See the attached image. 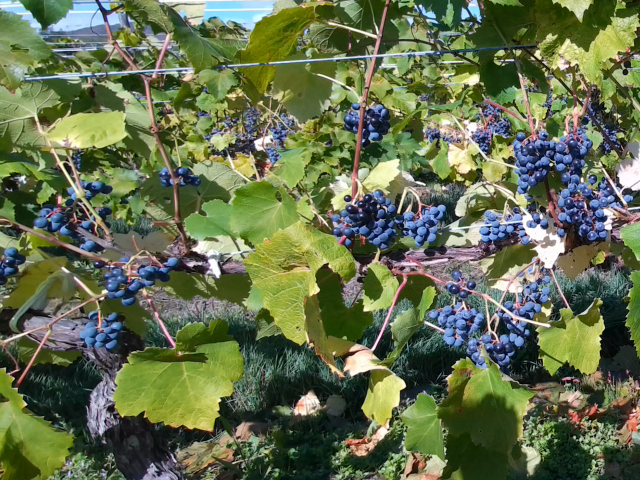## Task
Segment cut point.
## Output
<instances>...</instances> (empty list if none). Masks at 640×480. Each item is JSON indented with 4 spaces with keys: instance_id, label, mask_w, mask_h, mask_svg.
Segmentation results:
<instances>
[{
    "instance_id": "cut-point-1",
    "label": "cut point",
    "mask_w": 640,
    "mask_h": 480,
    "mask_svg": "<svg viewBox=\"0 0 640 480\" xmlns=\"http://www.w3.org/2000/svg\"><path fill=\"white\" fill-rule=\"evenodd\" d=\"M143 253H145L147 256H149V257H151V258H154V255H153V254L149 253L147 249L142 248V250H141V251H139L137 254H135V255H133V256H131V257L129 258V261L127 262V264H130L132 260L136 259L137 257H139L140 255H142Z\"/></svg>"
},
{
    "instance_id": "cut-point-2",
    "label": "cut point",
    "mask_w": 640,
    "mask_h": 480,
    "mask_svg": "<svg viewBox=\"0 0 640 480\" xmlns=\"http://www.w3.org/2000/svg\"><path fill=\"white\" fill-rule=\"evenodd\" d=\"M158 132H159V133H167V134H169L170 136H172V137L175 139V150H176V153H179V148H178V137H177L174 133H172L170 130H161V129H158Z\"/></svg>"
},
{
    "instance_id": "cut-point-3",
    "label": "cut point",
    "mask_w": 640,
    "mask_h": 480,
    "mask_svg": "<svg viewBox=\"0 0 640 480\" xmlns=\"http://www.w3.org/2000/svg\"><path fill=\"white\" fill-rule=\"evenodd\" d=\"M406 191H408V192L412 193V194L416 197V199H417V201H418V206H421V198H420L419 194H417V192H415V191H414L413 189H411V188H406Z\"/></svg>"
},
{
    "instance_id": "cut-point-4",
    "label": "cut point",
    "mask_w": 640,
    "mask_h": 480,
    "mask_svg": "<svg viewBox=\"0 0 640 480\" xmlns=\"http://www.w3.org/2000/svg\"><path fill=\"white\" fill-rule=\"evenodd\" d=\"M356 182L358 184V194H362V192H365V187L363 183L360 182L359 178H357Z\"/></svg>"
}]
</instances>
